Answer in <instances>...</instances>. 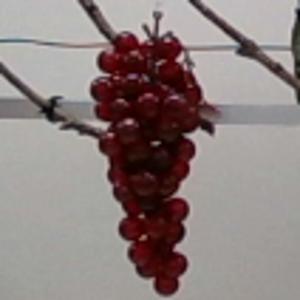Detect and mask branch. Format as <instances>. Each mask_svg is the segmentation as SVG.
<instances>
[{
	"label": "branch",
	"instance_id": "325d2c04",
	"mask_svg": "<svg viewBox=\"0 0 300 300\" xmlns=\"http://www.w3.org/2000/svg\"><path fill=\"white\" fill-rule=\"evenodd\" d=\"M0 76L38 108L37 115L45 116L46 121L51 125L61 123L57 127L59 131H74L79 137H90L98 141H100L103 134L108 132V129L94 127L62 111L59 108V100H63L64 95L54 94L49 96L48 99L44 98L14 75L12 70L1 60Z\"/></svg>",
	"mask_w": 300,
	"mask_h": 300
},
{
	"label": "branch",
	"instance_id": "170604dd",
	"mask_svg": "<svg viewBox=\"0 0 300 300\" xmlns=\"http://www.w3.org/2000/svg\"><path fill=\"white\" fill-rule=\"evenodd\" d=\"M96 32L111 46L112 38L118 33L108 21L95 0H75Z\"/></svg>",
	"mask_w": 300,
	"mask_h": 300
},
{
	"label": "branch",
	"instance_id": "30e6481e",
	"mask_svg": "<svg viewBox=\"0 0 300 300\" xmlns=\"http://www.w3.org/2000/svg\"><path fill=\"white\" fill-rule=\"evenodd\" d=\"M184 1L192 9H194L198 15L204 18V20H206L211 26L219 30L237 46L234 51L235 56L255 61L271 75L275 76L286 86L300 94V79L288 71L281 61H277L265 52L254 39H251L246 35V33L225 20L221 15L211 9L203 0Z\"/></svg>",
	"mask_w": 300,
	"mask_h": 300
},
{
	"label": "branch",
	"instance_id": "45aa463d",
	"mask_svg": "<svg viewBox=\"0 0 300 300\" xmlns=\"http://www.w3.org/2000/svg\"><path fill=\"white\" fill-rule=\"evenodd\" d=\"M200 118V125L197 130L207 134L213 140L217 136V124L222 119V112L205 97L203 104L196 110Z\"/></svg>",
	"mask_w": 300,
	"mask_h": 300
}]
</instances>
